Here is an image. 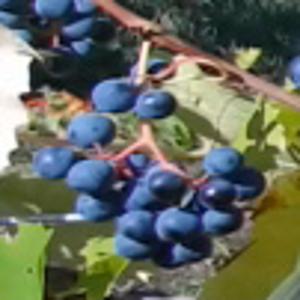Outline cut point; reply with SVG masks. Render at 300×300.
I'll use <instances>...</instances> for the list:
<instances>
[{
  "instance_id": "obj_1",
  "label": "cut point",
  "mask_w": 300,
  "mask_h": 300,
  "mask_svg": "<svg viewBox=\"0 0 300 300\" xmlns=\"http://www.w3.org/2000/svg\"><path fill=\"white\" fill-rule=\"evenodd\" d=\"M150 55L151 44L142 39V50L137 62V76L133 78V83L138 86H144L146 89L154 87V82L146 75V66Z\"/></svg>"
}]
</instances>
